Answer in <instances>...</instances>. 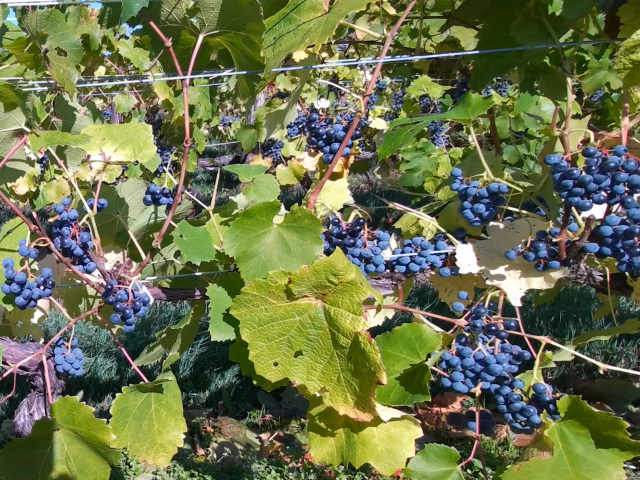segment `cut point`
<instances>
[{
  "instance_id": "obj_2",
  "label": "cut point",
  "mask_w": 640,
  "mask_h": 480,
  "mask_svg": "<svg viewBox=\"0 0 640 480\" xmlns=\"http://www.w3.org/2000/svg\"><path fill=\"white\" fill-rule=\"evenodd\" d=\"M545 344H546V342H542V346H541V348H540V350H539V352H538V354H537V356H536V359H535V362H534V371H533V374H537V365H538V361H539V359H540V357H541V355H542V352L544 351Z\"/></svg>"
},
{
  "instance_id": "obj_3",
  "label": "cut point",
  "mask_w": 640,
  "mask_h": 480,
  "mask_svg": "<svg viewBox=\"0 0 640 480\" xmlns=\"http://www.w3.org/2000/svg\"><path fill=\"white\" fill-rule=\"evenodd\" d=\"M183 147H184V142H183V143H181L179 146H177V148H175V149L172 151L171 155L169 156V158H168V160H167V166H166V169H170V163H171V161H172V158H173V157L175 156V154H176L180 149H182Z\"/></svg>"
},
{
  "instance_id": "obj_1",
  "label": "cut point",
  "mask_w": 640,
  "mask_h": 480,
  "mask_svg": "<svg viewBox=\"0 0 640 480\" xmlns=\"http://www.w3.org/2000/svg\"><path fill=\"white\" fill-rule=\"evenodd\" d=\"M342 110H344V111H348V112H351V113H353V114L357 115V111H356V110H353V109H351V108H346V107H337V108H335V109L333 110V112H332V118H335V116H336L339 112H342Z\"/></svg>"
}]
</instances>
